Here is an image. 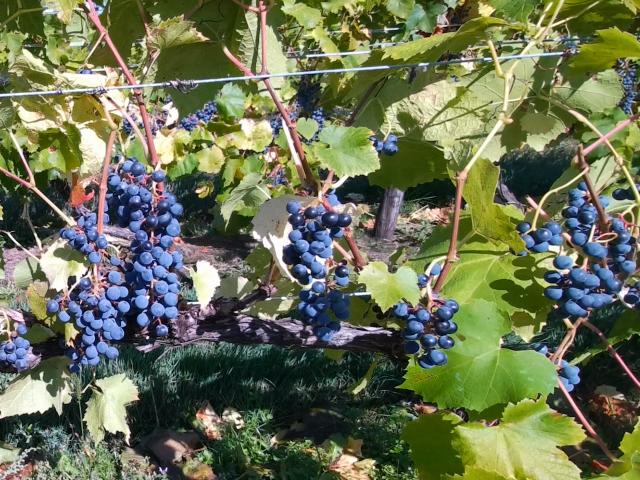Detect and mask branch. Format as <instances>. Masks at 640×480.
<instances>
[{
  "label": "branch",
  "instance_id": "1",
  "mask_svg": "<svg viewBox=\"0 0 640 480\" xmlns=\"http://www.w3.org/2000/svg\"><path fill=\"white\" fill-rule=\"evenodd\" d=\"M518 64H519V61H511L510 64L508 65V67L505 69L504 75H503V97H502V102H501V106H500V109H499V113H498L496 119L494 120V122L491 124V127L486 132L483 141L480 143V145L471 154V156L469 157V160L465 163V165L461 169L460 174L458 175V178H457V181H456V187H455V194H454V211H453V216H452V226H451V235H450V253H449V255L451 256V259L446 262L445 267H444L443 272H442V275L440 276L438 282L436 283V286L433 288V292L435 294H438L443 289V286L446 283V280L449 277V274H450V271L452 269V266H453V264H454V262L456 260V256H457V238H458L459 218H460V213H461V196H462L463 183L465 181V178H466L469 170L475 164V162H476L477 158L480 156V154L490 144L492 136L494 135V133L497 131L498 127L503 122V119H504V117L506 115V112H507V109H508V104H509V99H510V79H511V74H512V72L514 71V69L516 68V66Z\"/></svg>",
  "mask_w": 640,
  "mask_h": 480
},
{
  "label": "branch",
  "instance_id": "2",
  "mask_svg": "<svg viewBox=\"0 0 640 480\" xmlns=\"http://www.w3.org/2000/svg\"><path fill=\"white\" fill-rule=\"evenodd\" d=\"M263 84L266 90L270 93V96L272 97V100L277 107L280 118L282 119V121L285 124V127L287 128L288 132L292 136L293 143L295 145L297 153L299 154L302 165L305 167V172H306L307 181L309 183V187L314 193H317L319 191V188L314 179L312 165L308 160L306 152L304 151V148L299 138V134L295 130V127L293 126L290 118L288 117L286 113V109L284 108V104L280 100L277 91L272 86L271 81L269 79H264Z\"/></svg>",
  "mask_w": 640,
  "mask_h": 480
},
{
  "label": "branch",
  "instance_id": "3",
  "mask_svg": "<svg viewBox=\"0 0 640 480\" xmlns=\"http://www.w3.org/2000/svg\"><path fill=\"white\" fill-rule=\"evenodd\" d=\"M115 136H116V132L114 130H111L108 134L106 146L102 154L101 181H100L98 199L96 204V222H97V230L99 232H102L104 230L103 206L105 202L106 189L108 184L109 156L113 148Z\"/></svg>",
  "mask_w": 640,
  "mask_h": 480
},
{
  "label": "branch",
  "instance_id": "4",
  "mask_svg": "<svg viewBox=\"0 0 640 480\" xmlns=\"http://www.w3.org/2000/svg\"><path fill=\"white\" fill-rule=\"evenodd\" d=\"M87 9H88V12H89L91 18L94 20V23L96 24V26L98 27V29L102 33L107 45L109 46V48L111 49L112 53L114 54V56L119 61L120 67H121L124 75L128 79V81L130 83H137V79L131 73V71H130L128 65H127L126 58L120 52V50L116 46V43L113 41V39H112V37H111V35L109 33V30L105 27V24L102 22L100 16L96 12L94 4L92 2H89L87 4Z\"/></svg>",
  "mask_w": 640,
  "mask_h": 480
},
{
  "label": "branch",
  "instance_id": "5",
  "mask_svg": "<svg viewBox=\"0 0 640 480\" xmlns=\"http://www.w3.org/2000/svg\"><path fill=\"white\" fill-rule=\"evenodd\" d=\"M577 160H578L580 169L585 168L587 170V173L584 175V179L586 180L589 187V196L593 199L599 213V218L601 221L600 232L602 234H605L608 229V219H607L605 207L599 195L596 193V184L593 178L591 177V174L589 173V170L585 161V157H584V148L582 146H579L577 148Z\"/></svg>",
  "mask_w": 640,
  "mask_h": 480
},
{
  "label": "branch",
  "instance_id": "6",
  "mask_svg": "<svg viewBox=\"0 0 640 480\" xmlns=\"http://www.w3.org/2000/svg\"><path fill=\"white\" fill-rule=\"evenodd\" d=\"M135 97L139 103L143 123H144V140L146 144V148L148 150V154L151 157L152 162L155 165L160 163V159L158 158L157 153L155 152V148L153 146L152 138H151V120L149 117L146 100L142 95V91L139 88L134 90Z\"/></svg>",
  "mask_w": 640,
  "mask_h": 480
},
{
  "label": "branch",
  "instance_id": "7",
  "mask_svg": "<svg viewBox=\"0 0 640 480\" xmlns=\"http://www.w3.org/2000/svg\"><path fill=\"white\" fill-rule=\"evenodd\" d=\"M259 12L261 18L259 19V37H260V73H267V35H266V20L268 19V11L266 9L265 1H258Z\"/></svg>",
  "mask_w": 640,
  "mask_h": 480
},
{
  "label": "branch",
  "instance_id": "8",
  "mask_svg": "<svg viewBox=\"0 0 640 480\" xmlns=\"http://www.w3.org/2000/svg\"><path fill=\"white\" fill-rule=\"evenodd\" d=\"M0 313L3 315L10 316L19 321H23L28 324H33L35 322V319L33 317L27 316L25 314H21L19 312H16L13 309L5 308L3 306H0Z\"/></svg>",
  "mask_w": 640,
  "mask_h": 480
},
{
  "label": "branch",
  "instance_id": "9",
  "mask_svg": "<svg viewBox=\"0 0 640 480\" xmlns=\"http://www.w3.org/2000/svg\"><path fill=\"white\" fill-rule=\"evenodd\" d=\"M346 240L348 241L349 246L352 249V252L354 253L357 264L359 266H362L364 264V259L362 257L359 247L357 246L355 238L351 234H348L346 236Z\"/></svg>",
  "mask_w": 640,
  "mask_h": 480
},
{
  "label": "branch",
  "instance_id": "10",
  "mask_svg": "<svg viewBox=\"0 0 640 480\" xmlns=\"http://www.w3.org/2000/svg\"><path fill=\"white\" fill-rule=\"evenodd\" d=\"M553 6H554V2L552 0H549L547 4L543 7V10L541 11L536 21V26L538 28H541L543 26V23Z\"/></svg>",
  "mask_w": 640,
  "mask_h": 480
}]
</instances>
